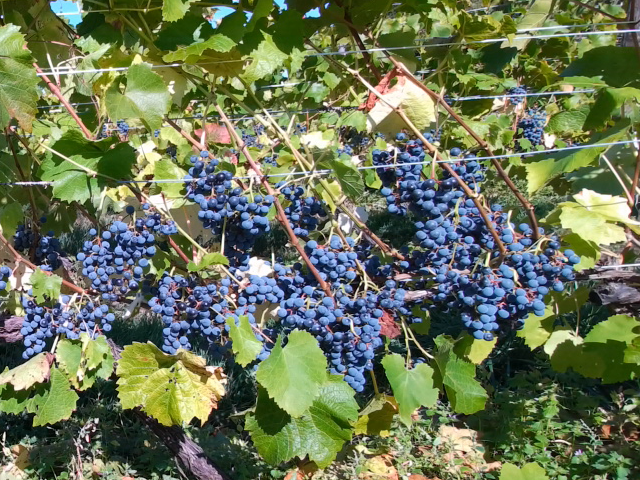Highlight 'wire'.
<instances>
[{
    "label": "wire",
    "mask_w": 640,
    "mask_h": 480,
    "mask_svg": "<svg viewBox=\"0 0 640 480\" xmlns=\"http://www.w3.org/2000/svg\"><path fill=\"white\" fill-rule=\"evenodd\" d=\"M633 144H640V139H630L627 141H607L602 143H591V144H573L569 146H563V147L552 148V149L521 151L514 154H508V153L483 154V155H475L470 157H461L456 159L435 160L434 164L448 165V164H458V163H464V162H472L477 160L495 159V158L516 159L523 156L555 154V153L571 151L575 149H594V148H605L610 146H629Z\"/></svg>",
    "instance_id": "obj_1"
},
{
    "label": "wire",
    "mask_w": 640,
    "mask_h": 480,
    "mask_svg": "<svg viewBox=\"0 0 640 480\" xmlns=\"http://www.w3.org/2000/svg\"><path fill=\"white\" fill-rule=\"evenodd\" d=\"M508 37H489L481 40L472 41H456L451 43H434V44H410L399 47H376V48H360V49H347L340 51H320V56H342L350 54H362V53H378V52H402L412 49H436V48H453L458 46H474L483 45L491 42H508Z\"/></svg>",
    "instance_id": "obj_2"
},
{
    "label": "wire",
    "mask_w": 640,
    "mask_h": 480,
    "mask_svg": "<svg viewBox=\"0 0 640 480\" xmlns=\"http://www.w3.org/2000/svg\"><path fill=\"white\" fill-rule=\"evenodd\" d=\"M639 28H622V29H611V30H579L574 31L572 33H551V34H543V35H522V36H513V41H525V40H545V39H554V38H574L581 35H614V34H624V33H639Z\"/></svg>",
    "instance_id": "obj_3"
},
{
    "label": "wire",
    "mask_w": 640,
    "mask_h": 480,
    "mask_svg": "<svg viewBox=\"0 0 640 480\" xmlns=\"http://www.w3.org/2000/svg\"><path fill=\"white\" fill-rule=\"evenodd\" d=\"M619 24H640V19H617L609 21H585L581 23H568V24H548L533 27H518V32H535L551 29H570V28H583L587 26H611Z\"/></svg>",
    "instance_id": "obj_4"
},
{
    "label": "wire",
    "mask_w": 640,
    "mask_h": 480,
    "mask_svg": "<svg viewBox=\"0 0 640 480\" xmlns=\"http://www.w3.org/2000/svg\"><path fill=\"white\" fill-rule=\"evenodd\" d=\"M252 58H244V59H230V58H219L213 60H197V61H189V62H172V63H164V64H153V69H166V68H174V67H191V66H199V65H215V64H246L252 63Z\"/></svg>",
    "instance_id": "obj_5"
},
{
    "label": "wire",
    "mask_w": 640,
    "mask_h": 480,
    "mask_svg": "<svg viewBox=\"0 0 640 480\" xmlns=\"http://www.w3.org/2000/svg\"><path fill=\"white\" fill-rule=\"evenodd\" d=\"M127 67H115V68H100V69H83L76 71H66V72H49V71H41L37 73L38 77H68V76H78L85 74H103V73H117V72H127Z\"/></svg>",
    "instance_id": "obj_6"
},
{
    "label": "wire",
    "mask_w": 640,
    "mask_h": 480,
    "mask_svg": "<svg viewBox=\"0 0 640 480\" xmlns=\"http://www.w3.org/2000/svg\"><path fill=\"white\" fill-rule=\"evenodd\" d=\"M198 178L197 177H191V178H179V179H171V178H165V179H151V178H142V179H115L114 183L115 184H144V183H149V184H181V183H193V182H197Z\"/></svg>",
    "instance_id": "obj_7"
},
{
    "label": "wire",
    "mask_w": 640,
    "mask_h": 480,
    "mask_svg": "<svg viewBox=\"0 0 640 480\" xmlns=\"http://www.w3.org/2000/svg\"><path fill=\"white\" fill-rule=\"evenodd\" d=\"M333 172H334L333 168L313 169L309 171L273 172V173L255 174L254 178L264 179V178H276V177H300V176H311L315 174H330Z\"/></svg>",
    "instance_id": "obj_8"
},
{
    "label": "wire",
    "mask_w": 640,
    "mask_h": 480,
    "mask_svg": "<svg viewBox=\"0 0 640 480\" xmlns=\"http://www.w3.org/2000/svg\"><path fill=\"white\" fill-rule=\"evenodd\" d=\"M424 164L431 165L432 161L429 160V159H422V160H417V161L359 165L357 167V170L361 171V170L386 169V168H396V167L420 166V165H424Z\"/></svg>",
    "instance_id": "obj_9"
},
{
    "label": "wire",
    "mask_w": 640,
    "mask_h": 480,
    "mask_svg": "<svg viewBox=\"0 0 640 480\" xmlns=\"http://www.w3.org/2000/svg\"><path fill=\"white\" fill-rule=\"evenodd\" d=\"M51 184H52L51 180H46V181L15 180L10 182L0 181V187H13L17 185L49 186Z\"/></svg>",
    "instance_id": "obj_10"
},
{
    "label": "wire",
    "mask_w": 640,
    "mask_h": 480,
    "mask_svg": "<svg viewBox=\"0 0 640 480\" xmlns=\"http://www.w3.org/2000/svg\"><path fill=\"white\" fill-rule=\"evenodd\" d=\"M628 266H640V261H626V262H619V263L612 264V265L594 264L593 268L595 270H614V269H618V268H621V267H628Z\"/></svg>",
    "instance_id": "obj_11"
}]
</instances>
